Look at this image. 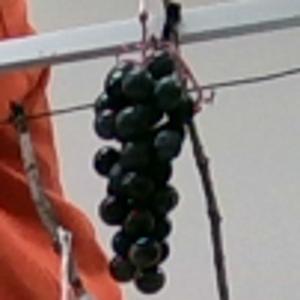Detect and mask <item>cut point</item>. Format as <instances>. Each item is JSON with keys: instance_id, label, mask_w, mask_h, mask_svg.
<instances>
[{"instance_id": "cut-point-1", "label": "cut point", "mask_w": 300, "mask_h": 300, "mask_svg": "<svg viewBox=\"0 0 300 300\" xmlns=\"http://www.w3.org/2000/svg\"><path fill=\"white\" fill-rule=\"evenodd\" d=\"M135 19L140 30V63L144 64L147 57L148 22L150 21L149 1H138V11Z\"/></svg>"}]
</instances>
